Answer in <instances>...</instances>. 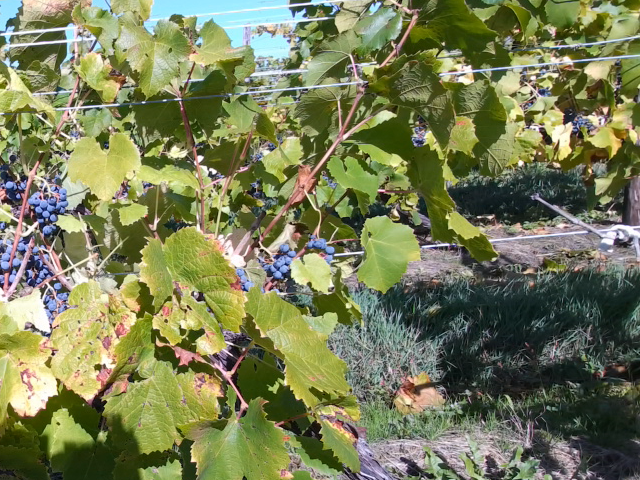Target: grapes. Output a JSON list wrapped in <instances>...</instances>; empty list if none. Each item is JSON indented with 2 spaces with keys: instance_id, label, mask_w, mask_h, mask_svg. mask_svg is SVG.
<instances>
[{
  "instance_id": "grapes-1",
  "label": "grapes",
  "mask_w": 640,
  "mask_h": 480,
  "mask_svg": "<svg viewBox=\"0 0 640 480\" xmlns=\"http://www.w3.org/2000/svg\"><path fill=\"white\" fill-rule=\"evenodd\" d=\"M50 191L58 193L59 201H57L56 196H45L44 200H41L39 191H35L28 199V204L34 205L35 213L37 214V222L40 224L41 232L45 237H49L57 231L56 225H45V219H48L49 223H54L58 220L55 211H58L60 214H64L66 212V208L69 206V201L67 200L68 189L51 186Z\"/></svg>"
},
{
  "instance_id": "grapes-2",
  "label": "grapes",
  "mask_w": 640,
  "mask_h": 480,
  "mask_svg": "<svg viewBox=\"0 0 640 480\" xmlns=\"http://www.w3.org/2000/svg\"><path fill=\"white\" fill-rule=\"evenodd\" d=\"M279 252L285 254H273V264L263 263L264 256H257L256 258V261L261 265V268L266 272L272 273V277L275 280L284 279V274L288 273V265H291L293 258L297 257V252L290 250L289 244H280Z\"/></svg>"
},
{
  "instance_id": "grapes-3",
  "label": "grapes",
  "mask_w": 640,
  "mask_h": 480,
  "mask_svg": "<svg viewBox=\"0 0 640 480\" xmlns=\"http://www.w3.org/2000/svg\"><path fill=\"white\" fill-rule=\"evenodd\" d=\"M38 252H39L38 247L33 246L32 253L35 255L31 257V261H29L28 264L26 265V278H27L26 284L28 286H32L33 288H36L41 281L54 276V272L48 269L47 265H43L44 260L39 259V255L37 254ZM32 266H35V268L38 270L36 278L32 277L33 276V271L31 270Z\"/></svg>"
},
{
  "instance_id": "grapes-4",
  "label": "grapes",
  "mask_w": 640,
  "mask_h": 480,
  "mask_svg": "<svg viewBox=\"0 0 640 480\" xmlns=\"http://www.w3.org/2000/svg\"><path fill=\"white\" fill-rule=\"evenodd\" d=\"M8 170H9L8 164H4L0 166V171H1L0 178L4 180V183H0V188L6 189V194L11 201L20 202L22 200L20 196V192H16V190L17 189L19 191L26 190L28 177L26 175H23L20 178V183L17 184L13 181V179L10 176H8V173L6 172Z\"/></svg>"
},
{
  "instance_id": "grapes-5",
  "label": "grapes",
  "mask_w": 640,
  "mask_h": 480,
  "mask_svg": "<svg viewBox=\"0 0 640 480\" xmlns=\"http://www.w3.org/2000/svg\"><path fill=\"white\" fill-rule=\"evenodd\" d=\"M309 241L306 242V249H320L323 250L327 255L325 256V261L327 265H330L334 260L333 254L336 253V249L333 245H328L326 238L317 239L316 235H310Z\"/></svg>"
},
{
  "instance_id": "grapes-6",
  "label": "grapes",
  "mask_w": 640,
  "mask_h": 480,
  "mask_svg": "<svg viewBox=\"0 0 640 480\" xmlns=\"http://www.w3.org/2000/svg\"><path fill=\"white\" fill-rule=\"evenodd\" d=\"M13 244L12 239H7L6 244H4V240L0 239V269L2 271L10 269V259L12 252V247L10 245Z\"/></svg>"
},
{
  "instance_id": "grapes-7",
  "label": "grapes",
  "mask_w": 640,
  "mask_h": 480,
  "mask_svg": "<svg viewBox=\"0 0 640 480\" xmlns=\"http://www.w3.org/2000/svg\"><path fill=\"white\" fill-rule=\"evenodd\" d=\"M43 304L46 305V307L44 308V311L46 312V315L49 319V323L53 324L54 323V316L52 314V312H54L58 306V300L57 299H52V295L51 294H46L43 300Z\"/></svg>"
},
{
  "instance_id": "grapes-8",
  "label": "grapes",
  "mask_w": 640,
  "mask_h": 480,
  "mask_svg": "<svg viewBox=\"0 0 640 480\" xmlns=\"http://www.w3.org/2000/svg\"><path fill=\"white\" fill-rule=\"evenodd\" d=\"M235 275H238V277H240L241 289L243 290V292H250V287H254V283H251V281H248L246 271L243 270L242 268H237L235 270Z\"/></svg>"
}]
</instances>
